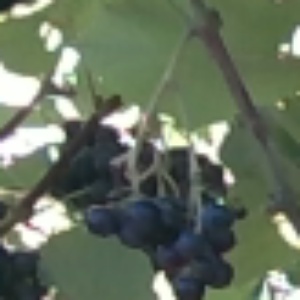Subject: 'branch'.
Masks as SVG:
<instances>
[{
  "mask_svg": "<svg viewBox=\"0 0 300 300\" xmlns=\"http://www.w3.org/2000/svg\"><path fill=\"white\" fill-rule=\"evenodd\" d=\"M54 80L55 74L52 71H47L44 74L39 89L16 107L0 129V140H6L15 131L25 114L34 106H37L47 95L51 98H71L82 93V87L79 84L56 87L53 85Z\"/></svg>",
  "mask_w": 300,
  "mask_h": 300,
  "instance_id": "branch-3",
  "label": "branch"
},
{
  "mask_svg": "<svg viewBox=\"0 0 300 300\" xmlns=\"http://www.w3.org/2000/svg\"><path fill=\"white\" fill-rule=\"evenodd\" d=\"M184 30L191 38L207 44L217 68L220 70L230 97L241 116V121L255 144L261 166L274 196L267 201L272 211H282L292 229L300 233V203L292 189L287 188L276 162L270 142L268 126L258 100L251 90L237 62L226 50L219 27V13L202 0H187Z\"/></svg>",
  "mask_w": 300,
  "mask_h": 300,
  "instance_id": "branch-1",
  "label": "branch"
},
{
  "mask_svg": "<svg viewBox=\"0 0 300 300\" xmlns=\"http://www.w3.org/2000/svg\"><path fill=\"white\" fill-rule=\"evenodd\" d=\"M124 103L121 95H115L112 99L101 103L91 114V116L83 123L78 132L71 138L53 163L49 166L48 172H44L39 179L33 182L27 191L21 195L17 201L9 209L8 214L0 221V234H5L8 229L18 220L20 214L32 201L40 197L44 192L50 189L58 179L60 170L70 159L73 153L79 149L82 143L88 140L89 134L102 121L103 117L118 109Z\"/></svg>",
  "mask_w": 300,
  "mask_h": 300,
  "instance_id": "branch-2",
  "label": "branch"
}]
</instances>
